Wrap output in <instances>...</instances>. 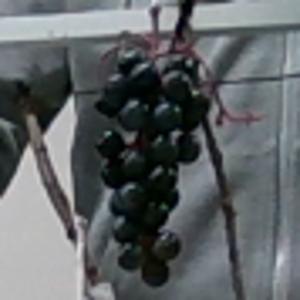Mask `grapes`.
<instances>
[{
  "label": "grapes",
  "mask_w": 300,
  "mask_h": 300,
  "mask_svg": "<svg viewBox=\"0 0 300 300\" xmlns=\"http://www.w3.org/2000/svg\"><path fill=\"white\" fill-rule=\"evenodd\" d=\"M118 70L102 83L93 108L135 134L126 140L115 130L98 134L95 147L103 158L98 176L113 191L107 208L115 217L111 237L121 244L117 266L129 274L140 272L144 286L160 289L170 280L168 265L184 252L180 235L166 230L169 213L181 201L180 164H193L203 155L196 130L213 102L190 81L197 72L190 56L170 58L159 74L154 59L132 47L121 55Z\"/></svg>",
  "instance_id": "grapes-1"
}]
</instances>
